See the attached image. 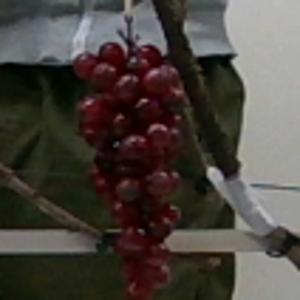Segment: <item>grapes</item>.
I'll use <instances>...</instances> for the list:
<instances>
[{"instance_id": "1", "label": "grapes", "mask_w": 300, "mask_h": 300, "mask_svg": "<svg viewBox=\"0 0 300 300\" xmlns=\"http://www.w3.org/2000/svg\"><path fill=\"white\" fill-rule=\"evenodd\" d=\"M71 73L98 95L77 108L84 142L100 149L89 172L92 196L125 233L100 251L98 262L130 284L126 300H149L171 280L168 243L183 218L174 196L185 187L183 147L192 118L177 91V68L154 44L126 56L121 44L106 40L97 55L80 53Z\"/></svg>"}]
</instances>
